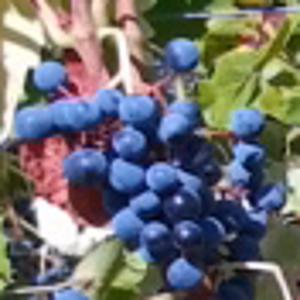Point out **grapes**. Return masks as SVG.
<instances>
[{"label": "grapes", "mask_w": 300, "mask_h": 300, "mask_svg": "<svg viewBox=\"0 0 300 300\" xmlns=\"http://www.w3.org/2000/svg\"><path fill=\"white\" fill-rule=\"evenodd\" d=\"M32 81L41 94L54 96L68 87L71 71L66 64L58 60H48L35 67Z\"/></svg>", "instance_id": "0513c4c2"}, {"label": "grapes", "mask_w": 300, "mask_h": 300, "mask_svg": "<svg viewBox=\"0 0 300 300\" xmlns=\"http://www.w3.org/2000/svg\"><path fill=\"white\" fill-rule=\"evenodd\" d=\"M198 61L197 43L183 36H175L166 43L160 65L171 74L185 75L194 70Z\"/></svg>", "instance_id": "b958b902"}, {"label": "grapes", "mask_w": 300, "mask_h": 300, "mask_svg": "<svg viewBox=\"0 0 300 300\" xmlns=\"http://www.w3.org/2000/svg\"><path fill=\"white\" fill-rule=\"evenodd\" d=\"M198 124L199 109L189 99L159 107L156 99L126 96L121 88L32 101L13 116L21 141L64 134L66 184L101 190L117 244L139 250L151 265L164 263L168 286L196 289L210 276L218 296L248 298L265 272L266 223L286 200L284 186L262 184L268 148L256 140L265 116L255 108L234 110L233 160L222 180Z\"/></svg>", "instance_id": "01657485"}]
</instances>
